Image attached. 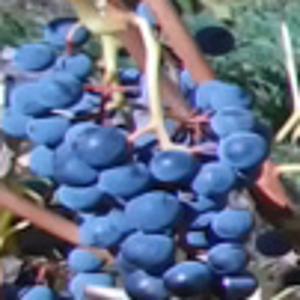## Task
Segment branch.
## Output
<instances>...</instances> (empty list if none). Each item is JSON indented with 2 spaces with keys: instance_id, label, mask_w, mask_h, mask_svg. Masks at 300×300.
<instances>
[{
  "instance_id": "30e6481e",
  "label": "branch",
  "mask_w": 300,
  "mask_h": 300,
  "mask_svg": "<svg viewBox=\"0 0 300 300\" xmlns=\"http://www.w3.org/2000/svg\"><path fill=\"white\" fill-rule=\"evenodd\" d=\"M0 206L15 217L30 224L37 225L46 232L73 247H80L82 251L100 255L109 264H113L115 257L109 250L82 245L79 240L80 225L67 217L53 213L32 200L17 194L6 181L0 182Z\"/></svg>"
},
{
  "instance_id": "325d2c04",
  "label": "branch",
  "mask_w": 300,
  "mask_h": 300,
  "mask_svg": "<svg viewBox=\"0 0 300 300\" xmlns=\"http://www.w3.org/2000/svg\"><path fill=\"white\" fill-rule=\"evenodd\" d=\"M146 5L157 20L166 44L178 62L201 82L213 77V68L198 50L186 24L170 0H146Z\"/></svg>"
},
{
  "instance_id": "170604dd",
  "label": "branch",
  "mask_w": 300,
  "mask_h": 300,
  "mask_svg": "<svg viewBox=\"0 0 300 300\" xmlns=\"http://www.w3.org/2000/svg\"><path fill=\"white\" fill-rule=\"evenodd\" d=\"M100 8L103 11L106 20L113 30L120 46L125 51L130 61L140 67V72H145L143 46L144 38L133 23H127L123 20L125 13L134 14L124 0H101Z\"/></svg>"
},
{
  "instance_id": "45aa463d",
  "label": "branch",
  "mask_w": 300,
  "mask_h": 300,
  "mask_svg": "<svg viewBox=\"0 0 300 300\" xmlns=\"http://www.w3.org/2000/svg\"><path fill=\"white\" fill-rule=\"evenodd\" d=\"M257 197L275 213L287 219H293L298 214L297 207L287 200L279 168L275 161L268 160L262 167V178L255 186Z\"/></svg>"
},
{
  "instance_id": "982ccf7c",
  "label": "branch",
  "mask_w": 300,
  "mask_h": 300,
  "mask_svg": "<svg viewBox=\"0 0 300 300\" xmlns=\"http://www.w3.org/2000/svg\"><path fill=\"white\" fill-rule=\"evenodd\" d=\"M158 70L161 90L173 108L176 116L179 118L181 124L186 128L194 127L197 123V118L192 109L189 107L186 99L179 91V88L175 83L174 76L170 71L164 70L162 66H159Z\"/></svg>"
}]
</instances>
